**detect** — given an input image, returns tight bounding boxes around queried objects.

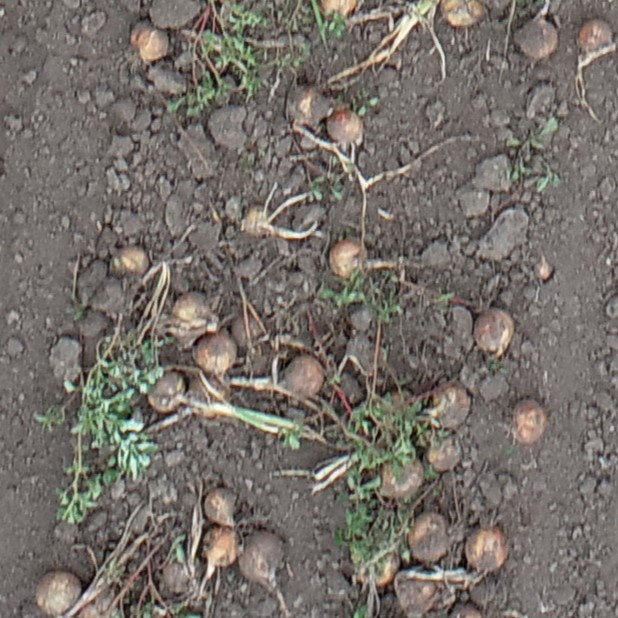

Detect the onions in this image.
[532,257,553,281]
[192,333,234,375]
[158,560,195,595]
[191,379,226,416]
[321,0,355,16]
[449,602,480,618]
[376,460,422,502]
[290,83,329,127]
[34,569,80,613]
[173,289,212,331]
[406,511,452,561]
[243,206,269,236]
[422,437,459,472]
[576,18,609,55]
[237,535,286,580]
[394,576,437,611]
[464,526,508,570]
[325,237,362,277]
[76,603,123,618]
[327,110,361,143]
[472,309,512,353]
[232,313,264,344]
[201,487,235,524]
[148,373,184,412]
[516,17,555,57]
[110,244,146,276]
[426,382,470,429]
[506,402,546,443]
[130,24,167,60]
[201,528,240,565]
[442,2,483,28]
[361,547,401,587]
[284,354,324,397]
